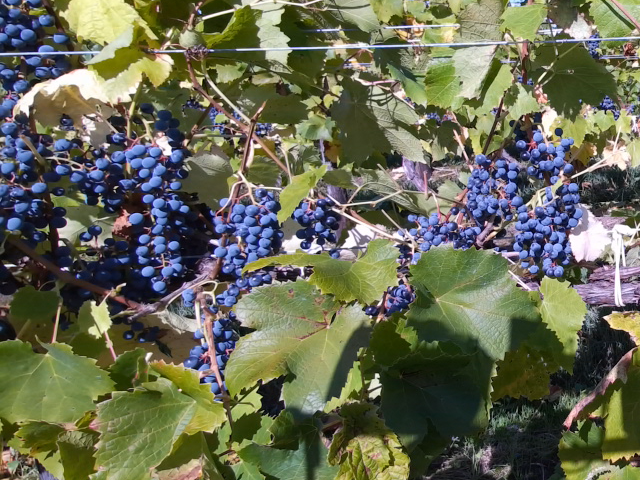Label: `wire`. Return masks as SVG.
<instances>
[{
    "label": "wire",
    "instance_id": "obj_1",
    "mask_svg": "<svg viewBox=\"0 0 640 480\" xmlns=\"http://www.w3.org/2000/svg\"><path fill=\"white\" fill-rule=\"evenodd\" d=\"M640 42L637 35L602 37V38H559L544 40H521L511 42H429V43H405V44H341L332 46L318 47H254V48H214V49H147V54H216V53H257V52H320L334 51L343 49H407V48H432V47H513L523 45H547L561 43H604V42H620L633 41Z\"/></svg>",
    "mask_w": 640,
    "mask_h": 480
},
{
    "label": "wire",
    "instance_id": "obj_2",
    "mask_svg": "<svg viewBox=\"0 0 640 480\" xmlns=\"http://www.w3.org/2000/svg\"><path fill=\"white\" fill-rule=\"evenodd\" d=\"M457 23H432L426 25L416 24H386L383 26L384 30L389 29H413V30H429L434 28H457Z\"/></svg>",
    "mask_w": 640,
    "mask_h": 480
}]
</instances>
